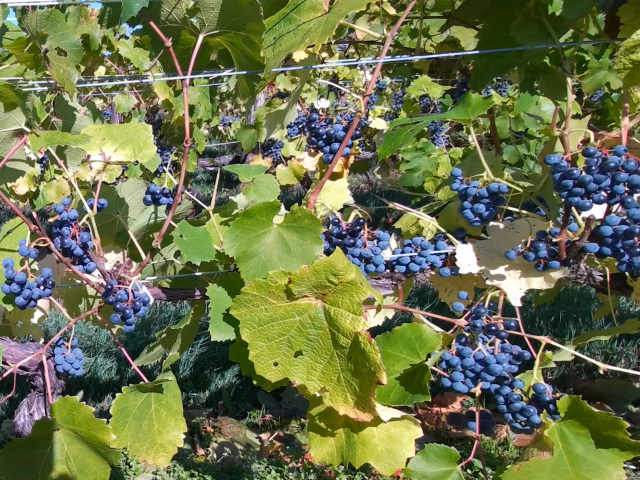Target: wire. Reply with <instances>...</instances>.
<instances>
[{
    "label": "wire",
    "instance_id": "wire-3",
    "mask_svg": "<svg viewBox=\"0 0 640 480\" xmlns=\"http://www.w3.org/2000/svg\"><path fill=\"white\" fill-rule=\"evenodd\" d=\"M235 273L234 269L229 270H203L202 272H183L172 273L165 275H148L142 278L143 282L151 280H167L174 278H186V277H205L206 275H232Z\"/></svg>",
    "mask_w": 640,
    "mask_h": 480
},
{
    "label": "wire",
    "instance_id": "wire-2",
    "mask_svg": "<svg viewBox=\"0 0 640 480\" xmlns=\"http://www.w3.org/2000/svg\"><path fill=\"white\" fill-rule=\"evenodd\" d=\"M261 73H262L261 69L248 70V71L215 70L213 73L195 74V75L181 76V77L142 78V79L116 81V82H83V83H78L77 88L81 89L86 87H118V86H129V85L144 84V83L183 82V81H192L197 79L215 78L218 75L250 76V75H257Z\"/></svg>",
    "mask_w": 640,
    "mask_h": 480
},
{
    "label": "wire",
    "instance_id": "wire-1",
    "mask_svg": "<svg viewBox=\"0 0 640 480\" xmlns=\"http://www.w3.org/2000/svg\"><path fill=\"white\" fill-rule=\"evenodd\" d=\"M608 43L607 39L602 40H579V41H560L554 43H540L534 45H526L521 47H513V48H493V49H478L473 51H463V52H439V53H429V54H416V55H406L396 58H381L376 60H359V61H342V62H329V63H320L316 65L310 66H279L273 67L272 72H281V71H312L318 70L322 68H331V67H344V66H361V65H379L384 63H398L408 60H418V59H431V58H441V57H465V56H475L480 54H496V53H515V52H523L529 50H536L542 48H556L562 46H582V45H605Z\"/></svg>",
    "mask_w": 640,
    "mask_h": 480
}]
</instances>
